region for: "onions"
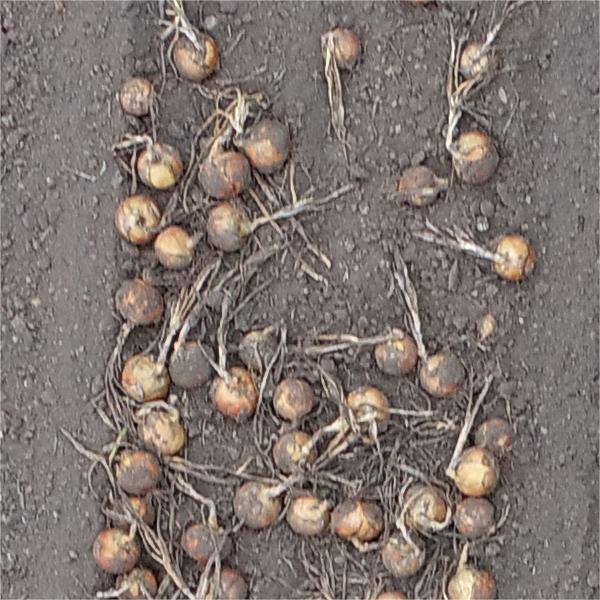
[117,196,162,242]
[375,331,417,373]
[345,386,386,430]
[113,280,164,324]
[401,483,449,531]
[322,29,359,64]
[180,522,219,560]
[117,77,152,114]
[289,492,328,534]
[114,567,154,597]
[122,357,167,400]
[444,565,497,599]
[209,368,256,415]
[168,25,219,78]
[381,532,419,574]
[215,567,246,599]
[272,379,313,419]
[95,527,137,570]
[451,128,497,182]
[418,350,463,394]
[490,232,534,280]
[373,582,410,597]
[274,429,316,469]
[399,164,439,205]
[456,41,492,79]
[126,497,153,522]
[239,118,289,168]
[200,151,251,197]
[239,324,281,371]
[137,141,181,185]
[114,447,161,494]
[451,448,496,495]
[136,405,185,452]
[154,226,192,268]
[235,481,283,527]
[453,497,493,535]
[203,201,247,248]
[475,415,510,451]
[170,341,214,387]
[333,498,383,540]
